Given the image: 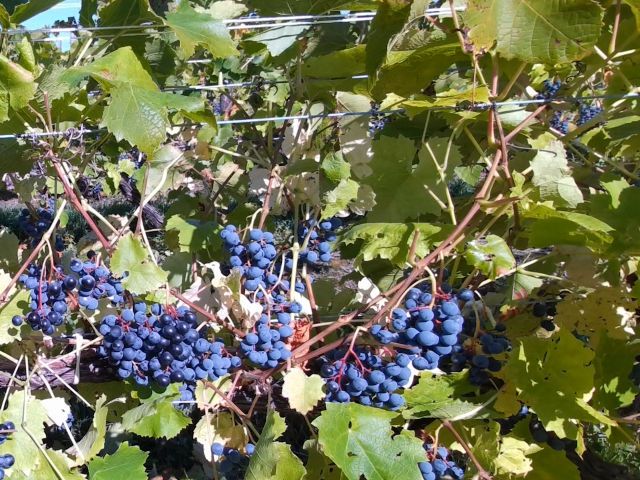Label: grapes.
<instances>
[{
	"mask_svg": "<svg viewBox=\"0 0 640 480\" xmlns=\"http://www.w3.org/2000/svg\"><path fill=\"white\" fill-rule=\"evenodd\" d=\"M147 304L136 301L133 309H124L122 316L107 315L101 319L98 333L103 336L97 353L118 365L122 378L132 374L140 385L149 383V374L161 387L170 381L181 383L207 376L219 380L228 369L240 368L239 357H224L226 341L207 340L199 331L196 314L180 306L176 316L163 315L161 303H153L149 317Z\"/></svg>",
	"mask_w": 640,
	"mask_h": 480,
	"instance_id": "01657485",
	"label": "grapes"
},
{
	"mask_svg": "<svg viewBox=\"0 0 640 480\" xmlns=\"http://www.w3.org/2000/svg\"><path fill=\"white\" fill-rule=\"evenodd\" d=\"M474 292L471 289L459 290L451 300H442L431 310L416 309L408 318L404 308H397L392 312L395 319L392 328L395 331L384 330L382 325H372L370 334L379 339L383 344L399 343L415 346L408 354L399 352L396 362H388L381 359L379 354H374L367 348H357L355 357L359 362H367L371 370L364 379L363 372L356 364H345L342 373L348 375L349 381L346 389L341 391L337 381L330 380L327 384L329 393L325 396L327 402L346 404L357 396L365 406H376L379 409L385 407L390 411L397 410L405 403V397L400 393H394L400 387H407L412 376L408 365L419 371L437 370L440 356L452 353H461L463 347L457 343L459 333L463 331L465 317L461 314L458 302L472 301ZM442 322L445 334L433 332L435 324L432 320Z\"/></svg>",
	"mask_w": 640,
	"mask_h": 480,
	"instance_id": "b958b902",
	"label": "grapes"
},
{
	"mask_svg": "<svg viewBox=\"0 0 640 480\" xmlns=\"http://www.w3.org/2000/svg\"><path fill=\"white\" fill-rule=\"evenodd\" d=\"M55 270L63 275L65 268L61 264L55 266ZM43 266L30 263L27 275H22L18 280L21 286L30 290L31 310L27 314V321L34 331L40 329L46 335H52L55 327L62 326L65 322V313L68 311L67 291L77 286V278L72 274H65L61 281L42 283Z\"/></svg>",
	"mask_w": 640,
	"mask_h": 480,
	"instance_id": "0513c4c2",
	"label": "grapes"
},
{
	"mask_svg": "<svg viewBox=\"0 0 640 480\" xmlns=\"http://www.w3.org/2000/svg\"><path fill=\"white\" fill-rule=\"evenodd\" d=\"M237 227L234 224H227L225 229L218 232V236L226 240L224 250L231 252L229 265L235 270H240L243 275H249L251 278L244 283L248 291L256 290L260 285L264 288H271L279 282V278L275 274H279L282 264L277 262L273 273H269L266 277V269L271 266V262L276 256V247L274 243V235L270 231H263L260 228H254L250 231V239L253 241L249 244V253L255 260H259L257 266L248 267L244 265V260L240 258L242 253L246 251L244 244H238L240 237L236 234ZM288 279L279 282V288L282 291H288Z\"/></svg>",
	"mask_w": 640,
	"mask_h": 480,
	"instance_id": "84f90ec7",
	"label": "grapes"
},
{
	"mask_svg": "<svg viewBox=\"0 0 640 480\" xmlns=\"http://www.w3.org/2000/svg\"><path fill=\"white\" fill-rule=\"evenodd\" d=\"M270 315H276V320L283 324L269 330V326L266 323L269 321L267 315H261L260 320L257 321L258 327L256 335L255 332L246 334V341L239 343V348L248 356V359L254 363L259 364L262 368L279 367L280 360H289L292 358V353L286 349V344L281 338H290L294 335L292 330L286 324L289 323V313L287 311H275L270 310Z\"/></svg>",
	"mask_w": 640,
	"mask_h": 480,
	"instance_id": "f8a65327",
	"label": "grapes"
},
{
	"mask_svg": "<svg viewBox=\"0 0 640 480\" xmlns=\"http://www.w3.org/2000/svg\"><path fill=\"white\" fill-rule=\"evenodd\" d=\"M70 271L78 273V283L81 285L77 290L79 304L90 311L99 308V298L105 297L113 303H121L125 300L123 284L111 276V271L105 267H97L95 262L72 259L70 261Z\"/></svg>",
	"mask_w": 640,
	"mask_h": 480,
	"instance_id": "5460f4e3",
	"label": "grapes"
},
{
	"mask_svg": "<svg viewBox=\"0 0 640 480\" xmlns=\"http://www.w3.org/2000/svg\"><path fill=\"white\" fill-rule=\"evenodd\" d=\"M341 225V220L338 217L327 218L320 224V228L327 232L325 239L328 242H321L318 245V254L316 251H312L309 248H305L300 252L299 260L302 262L306 260L308 264L317 263L319 258L322 262L328 263L331 260L332 247L329 243H333L337 239V233L332 229H337Z\"/></svg>",
	"mask_w": 640,
	"mask_h": 480,
	"instance_id": "83cd7487",
	"label": "grapes"
},
{
	"mask_svg": "<svg viewBox=\"0 0 640 480\" xmlns=\"http://www.w3.org/2000/svg\"><path fill=\"white\" fill-rule=\"evenodd\" d=\"M418 469L426 480L442 478L446 473L456 480H461L464 476V472L455 462H446L444 459H435L432 463H420Z\"/></svg>",
	"mask_w": 640,
	"mask_h": 480,
	"instance_id": "e5b3c951",
	"label": "grapes"
},
{
	"mask_svg": "<svg viewBox=\"0 0 640 480\" xmlns=\"http://www.w3.org/2000/svg\"><path fill=\"white\" fill-rule=\"evenodd\" d=\"M432 285L422 282L419 287H413L404 297L407 310L423 307L432 301Z\"/></svg>",
	"mask_w": 640,
	"mask_h": 480,
	"instance_id": "2adb6a1f",
	"label": "grapes"
},
{
	"mask_svg": "<svg viewBox=\"0 0 640 480\" xmlns=\"http://www.w3.org/2000/svg\"><path fill=\"white\" fill-rule=\"evenodd\" d=\"M195 385L187 386L186 383H183L179 387L180 396L173 399V406L176 408H185V407H193L195 405L196 397L195 394Z\"/></svg>",
	"mask_w": 640,
	"mask_h": 480,
	"instance_id": "ef6de9ee",
	"label": "grapes"
},
{
	"mask_svg": "<svg viewBox=\"0 0 640 480\" xmlns=\"http://www.w3.org/2000/svg\"><path fill=\"white\" fill-rule=\"evenodd\" d=\"M211 453L215 456H227L230 462H240V452L235 448L224 447L221 443L214 442L211 445Z\"/></svg>",
	"mask_w": 640,
	"mask_h": 480,
	"instance_id": "1ff8f66d",
	"label": "grapes"
},
{
	"mask_svg": "<svg viewBox=\"0 0 640 480\" xmlns=\"http://www.w3.org/2000/svg\"><path fill=\"white\" fill-rule=\"evenodd\" d=\"M271 303H278L279 305H288V310L291 313L297 314L302 309V304L298 301H293L290 303L285 302V297L281 294H278L276 290L271 292V297L269 298Z\"/></svg>",
	"mask_w": 640,
	"mask_h": 480,
	"instance_id": "54f908b8",
	"label": "grapes"
},
{
	"mask_svg": "<svg viewBox=\"0 0 640 480\" xmlns=\"http://www.w3.org/2000/svg\"><path fill=\"white\" fill-rule=\"evenodd\" d=\"M342 365L343 362L341 360H338L334 366L330 362H326L320 367L321 375L325 378L334 377L339 373Z\"/></svg>",
	"mask_w": 640,
	"mask_h": 480,
	"instance_id": "91a60905",
	"label": "grapes"
},
{
	"mask_svg": "<svg viewBox=\"0 0 640 480\" xmlns=\"http://www.w3.org/2000/svg\"><path fill=\"white\" fill-rule=\"evenodd\" d=\"M0 444H4L7 437L11 436L15 432V426L12 421H6L0 423Z\"/></svg>",
	"mask_w": 640,
	"mask_h": 480,
	"instance_id": "dcf779d0",
	"label": "grapes"
},
{
	"mask_svg": "<svg viewBox=\"0 0 640 480\" xmlns=\"http://www.w3.org/2000/svg\"><path fill=\"white\" fill-rule=\"evenodd\" d=\"M15 462L14 456L13 455H0V479H3L5 477V471L3 469L4 467H10L11 465H13Z\"/></svg>",
	"mask_w": 640,
	"mask_h": 480,
	"instance_id": "802abce8",
	"label": "grapes"
}]
</instances>
